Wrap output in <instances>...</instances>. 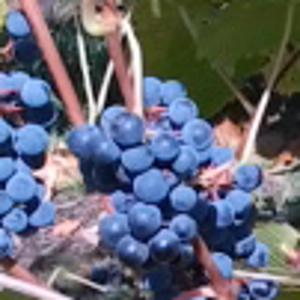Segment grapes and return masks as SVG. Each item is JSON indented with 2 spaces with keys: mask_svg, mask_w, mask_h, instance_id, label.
<instances>
[{
  "mask_svg": "<svg viewBox=\"0 0 300 300\" xmlns=\"http://www.w3.org/2000/svg\"><path fill=\"white\" fill-rule=\"evenodd\" d=\"M142 95V115L110 105L97 126H76L66 136L86 191L109 197L114 212L98 225L100 243L117 248L125 265L154 259L188 272L198 264L201 233L221 277L233 276V260L267 266V248L250 229L263 169L240 168L230 148L215 146L216 126L201 117L188 84L150 75Z\"/></svg>",
  "mask_w": 300,
  "mask_h": 300,
  "instance_id": "01657485",
  "label": "grapes"
},
{
  "mask_svg": "<svg viewBox=\"0 0 300 300\" xmlns=\"http://www.w3.org/2000/svg\"><path fill=\"white\" fill-rule=\"evenodd\" d=\"M51 94L44 77L0 71V263L13 253L9 232L28 236L57 217L44 181L34 174L49 163Z\"/></svg>",
  "mask_w": 300,
  "mask_h": 300,
  "instance_id": "b958b902",
  "label": "grapes"
},
{
  "mask_svg": "<svg viewBox=\"0 0 300 300\" xmlns=\"http://www.w3.org/2000/svg\"><path fill=\"white\" fill-rule=\"evenodd\" d=\"M282 292V285L271 278H246L238 290L241 300H273Z\"/></svg>",
  "mask_w": 300,
  "mask_h": 300,
  "instance_id": "0513c4c2",
  "label": "grapes"
},
{
  "mask_svg": "<svg viewBox=\"0 0 300 300\" xmlns=\"http://www.w3.org/2000/svg\"><path fill=\"white\" fill-rule=\"evenodd\" d=\"M5 33L11 39H29L32 32L22 11H11L5 18Z\"/></svg>",
  "mask_w": 300,
  "mask_h": 300,
  "instance_id": "84f90ec7",
  "label": "grapes"
}]
</instances>
